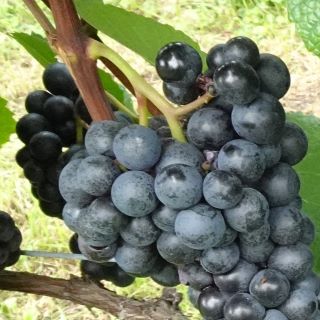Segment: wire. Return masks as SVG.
Segmentation results:
<instances>
[{
    "label": "wire",
    "instance_id": "d2f4af69",
    "mask_svg": "<svg viewBox=\"0 0 320 320\" xmlns=\"http://www.w3.org/2000/svg\"><path fill=\"white\" fill-rule=\"evenodd\" d=\"M20 255L66 258V259H74V260H82V261H93L98 263L99 262H117L114 256L111 259L100 261V260L90 259L82 254L59 253V252L20 251Z\"/></svg>",
    "mask_w": 320,
    "mask_h": 320
}]
</instances>
